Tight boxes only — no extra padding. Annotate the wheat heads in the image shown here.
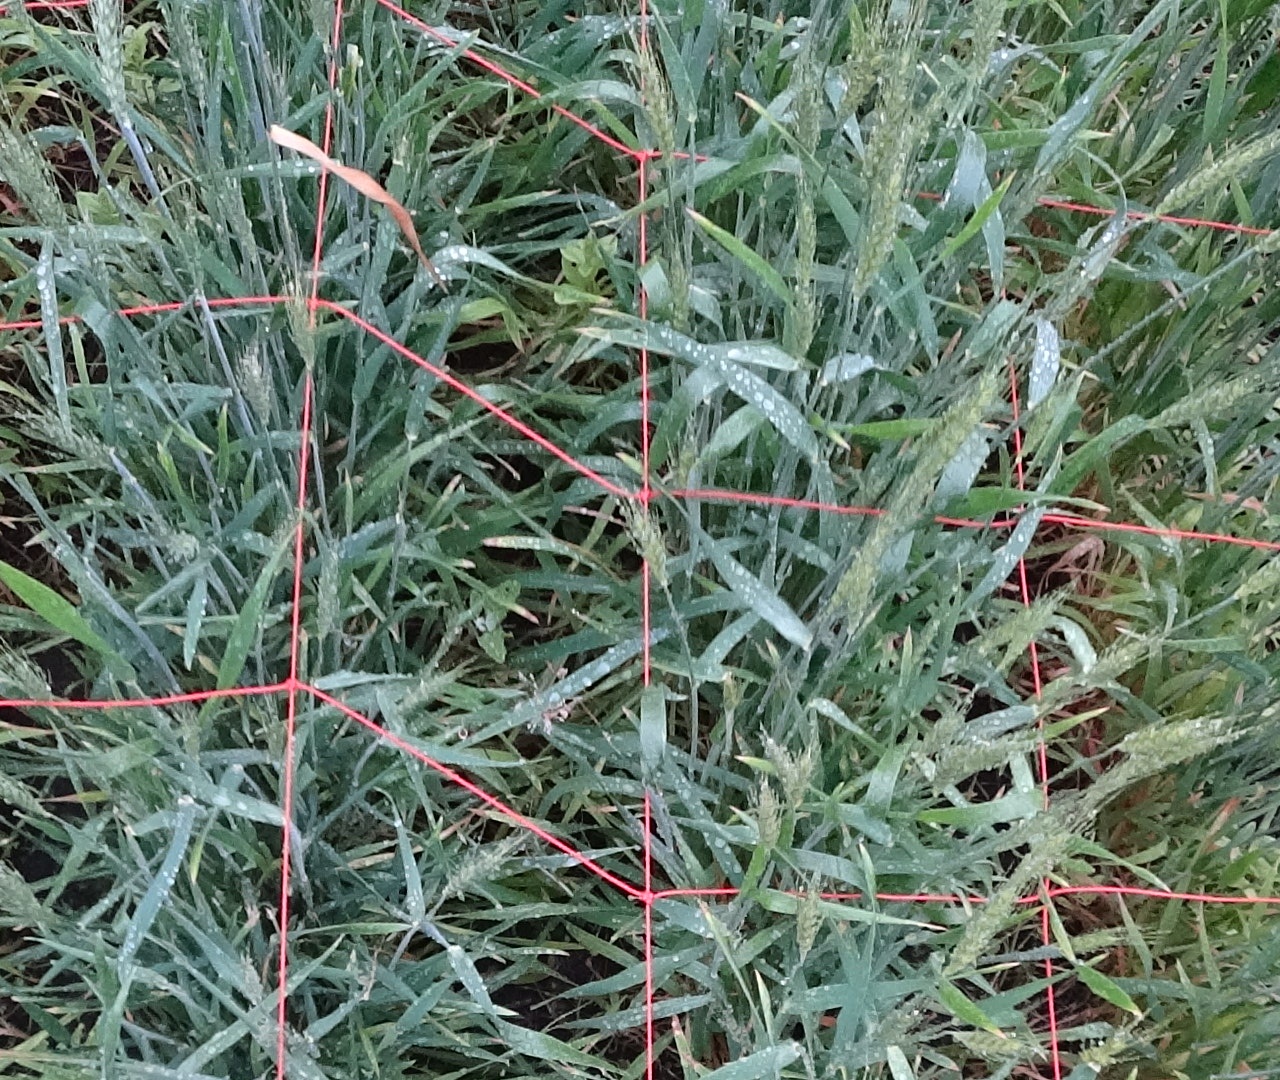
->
[945,873,1034,970]
[1115,729,1212,763]
[242,356,270,410]
[837,25,905,122]
[986,589,1066,645]
[1008,606,1052,663]
[1151,380,1254,429]
[932,743,1026,786]
[767,741,810,793]
[961,6,1010,70]
[682,434,703,487]
[1159,132,1280,213]
[280,286,320,359]
[748,785,782,847]
[623,511,669,588]
[636,52,681,175]
[867,64,915,165]
[37,411,112,464]
[853,133,912,299]
[240,958,264,1008]
[0,861,40,919]
[448,853,503,897]
[396,671,453,711]
[827,516,892,606]
[317,557,349,637]
[173,16,214,114]
[1238,546,1280,600]
[851,557,869,636]
[1085,640,1143,685]
[90,11,126,109]
[792,285,820,345]
[899,389,992,489]
[797,885,820,948]
[15,652,54,710]
[0,769,49,818]
[8,134,77,255]
[796,184,816,275]
[798,87,823,161]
